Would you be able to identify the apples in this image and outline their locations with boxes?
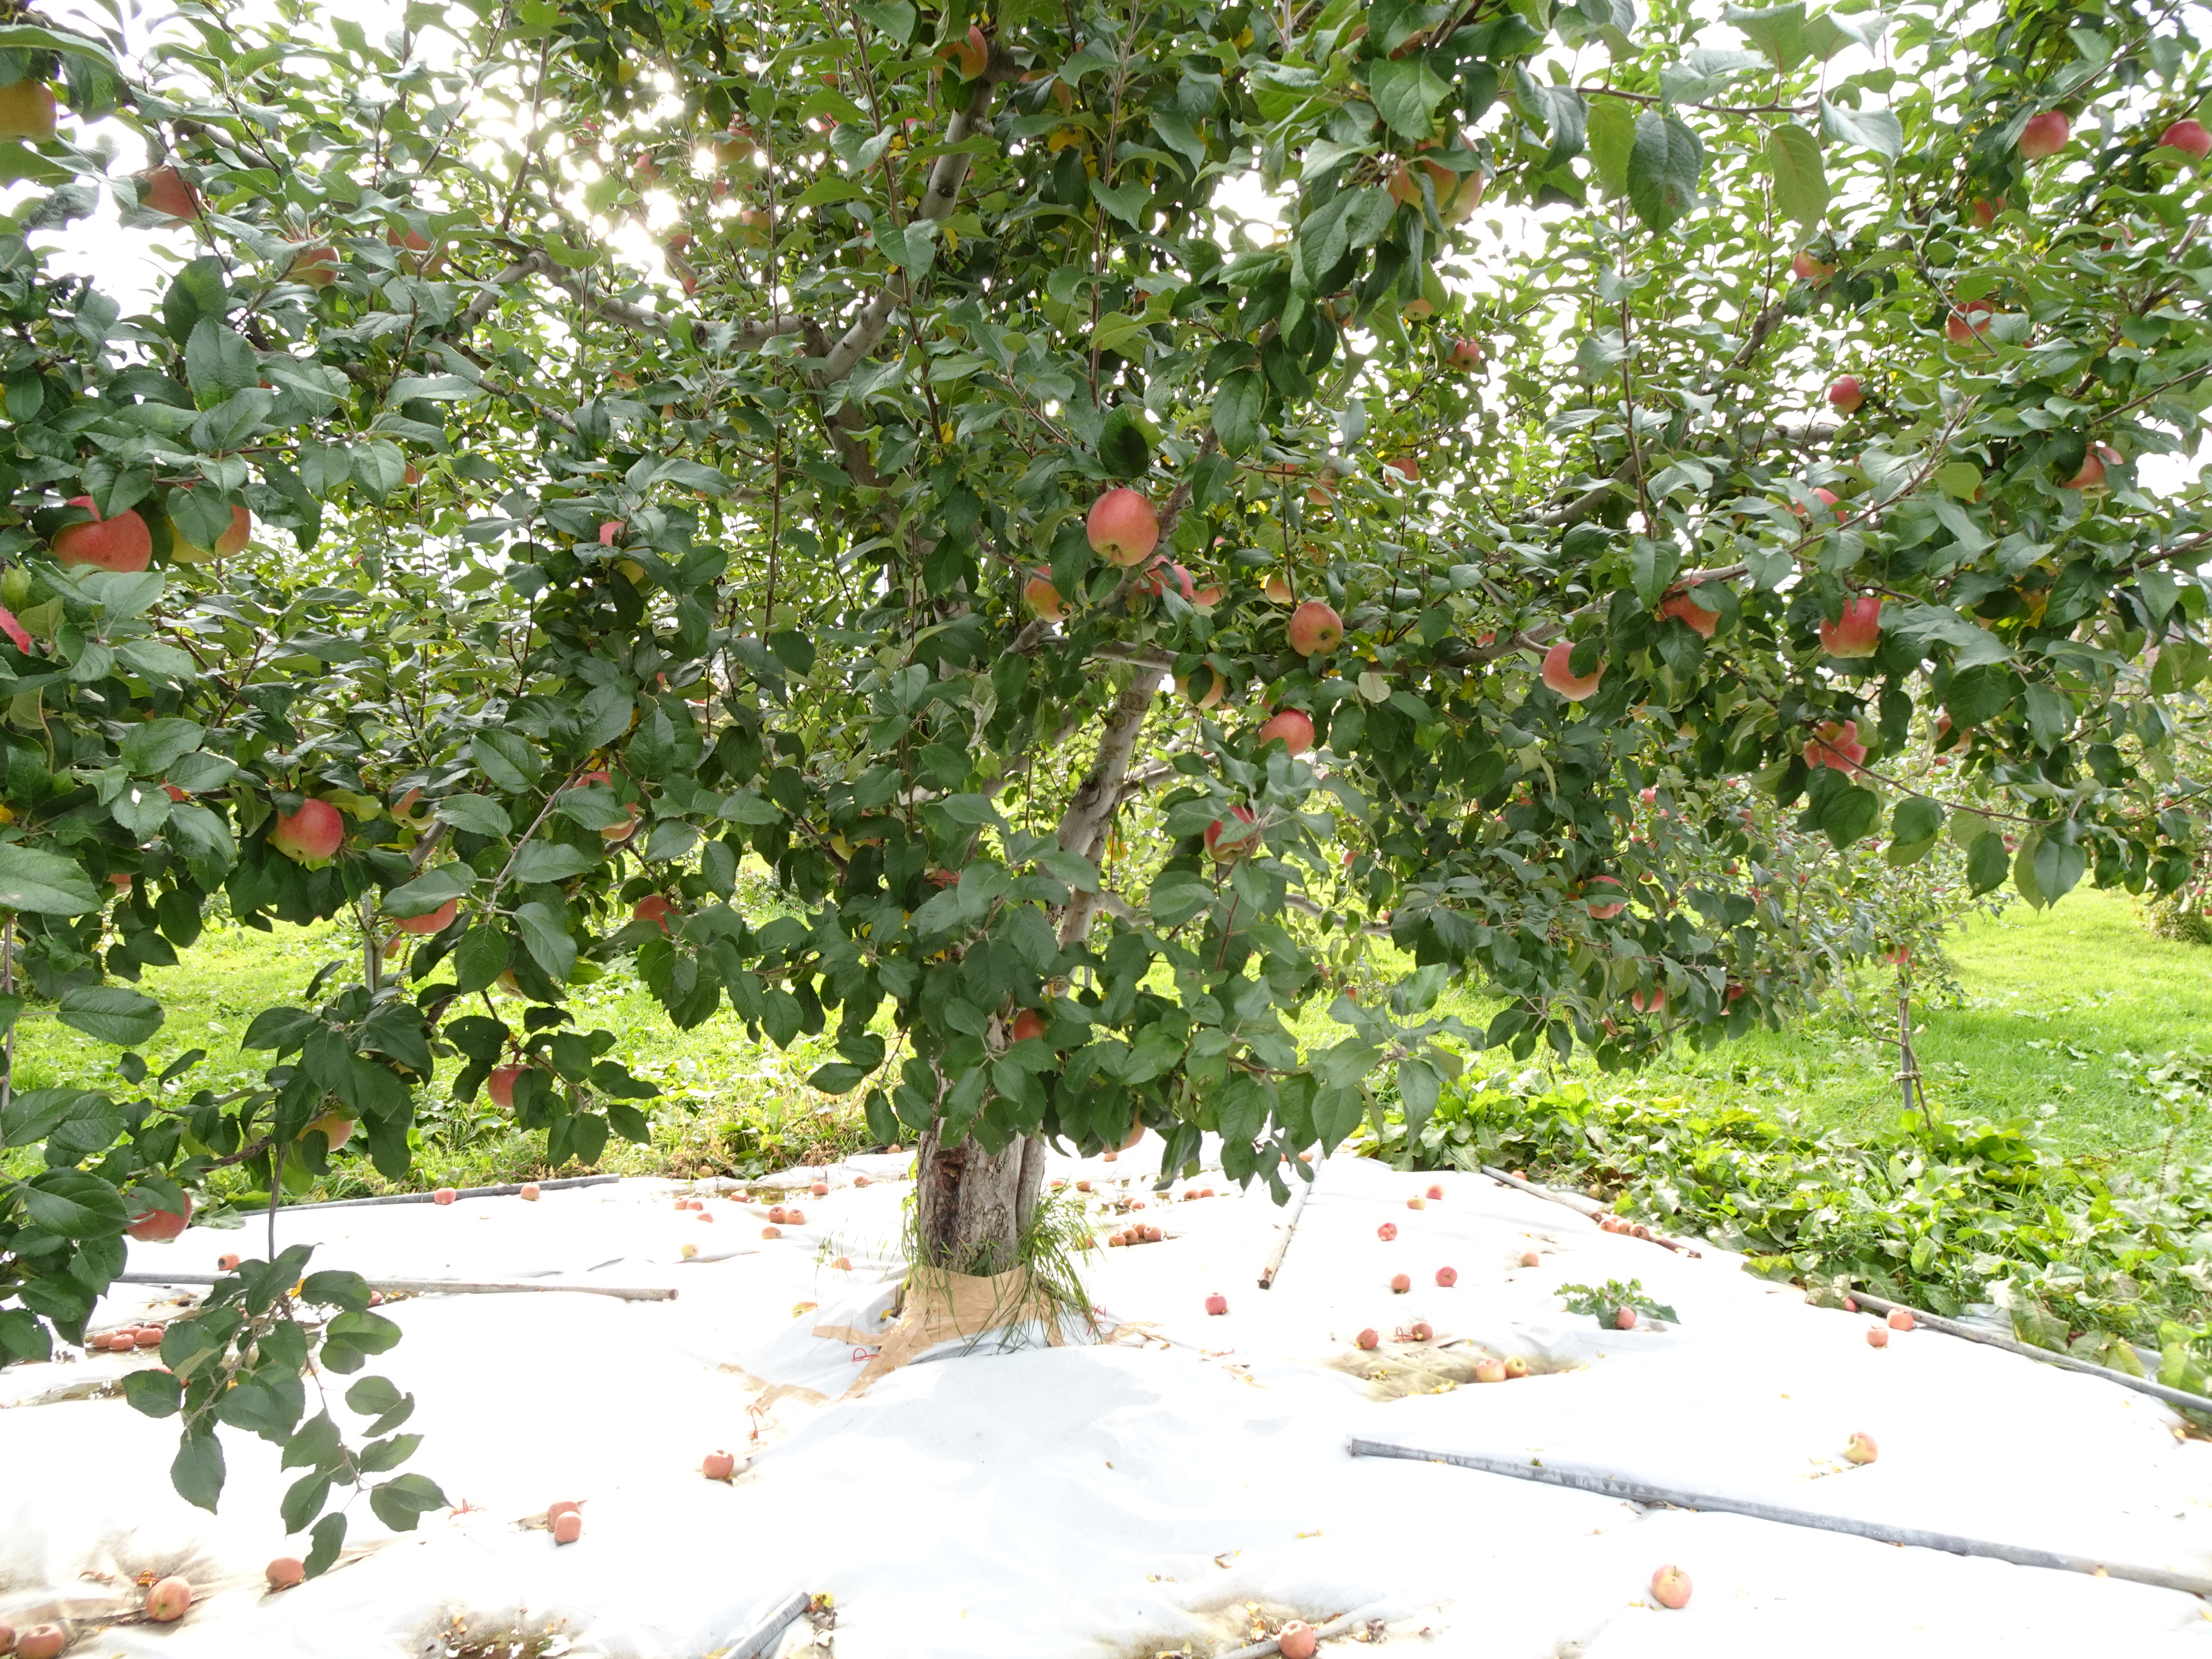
[814,47,863,92]
[265,796,343,862]
[1735,809,1759,828]
[1294,1149,1317,1166]
[1792,243,1839,292]
[45,496,152,587]
[1313,962,1334,983]
[1967,185,2018,231]
[1649,1562,1698,1611]
[1133,560,1195,621]
[713,129,755,173]
[1625,823,1643,833]
[1580,875,1631,919]
[1768,847,1784,860]
[2162,794,2179,812]
[859,228,898,267]
[1722,860,1743,878]
[663,248,696,283]
[1494,812,1514,834]
[1976,591,2010,633]
[123,166,201,232]
[1932,754,1950,768]
[681,270,716,302]
[1200,733,1239,772]
[2016,110,2070,162]
[264,1556,311,1585]
[18,1624,65,1659]
[2173,801,2198,820]
[1468,913,1492,929]
[1646,838,1660,851]
[897,113,945,151]
[1348,18,1426,78]
[608,352,645,390]
[1674,702,1709,742]
[1288,599,1345,659]
[739,210,772,239]
[2007,338,2041,374]
[1819,594,1893,659]
[1802,713,1871,776]
[0,607,38,670]
[1353,156,1384,187]
[1661,806,1674,818]
[657,390,686,419]
[226,346,267,394]
[1258,681,1317,725]
[695,466,723,505]
[393,869,459,936]
[725,169,759,199]
[0,77,59,147]
[355,762,396,799]
[929,842,982,900]
[546,1502,580,1526]
[701,176,728,205]
[1635,867,1656,889]
[1770,868,1793,890]
[2055,444,2126,502]
[1752,962,1774,981]
[1185,562,1235,607]
[630,660,669,702]
[569,774,640,829]
[289,1101,354,1151]
[2123,796,2136,810]
[1098,897,1129,927]
[1265,563,1303,602]
[1676,813,1690,828]
[1252,708,1317,764]
[1049,799,1072,819]
[1817,841,1835,858]
[2015,555,2066,614]
[587,515,649,585]
[385,213,447,277]
[1933,886,1950,901]
[965,163,1000,197]
[1631,1041,1663,1062]
[0,1618,19,1645]
[350,549,385,587]
[1379,909,1395,922]
[1278,1619,1320,1659]
[1317,653,1348,677]
[391,1059,420,1084]
[1931,708,1976,753]
[1851,441,1884,474]
[1635,784,1659,810]
[1269,970,1300,999]
[629,893,691,952]
[1063,39,1092,72]
[1978,802,1995,819]
[1466,784,1490,814]
[688,692,720,726]
[783,342,802,362]
[1778,486,1845,541]
[1662,894,1680,910]
[1613,806,1633,826]
[1827,368,1870,419]
[477,339,514,374]
[0,787,16,834]
[1795,870,1811,884]
[1203,806,1263,865]
[569,115,605,144]
[814,102,851,142]
[1598,1012,1627,1036]
[1629,686,1666,723]
[594,800,639,849]
[1085,487,1159,567]
[1879,943,1912,960]
[2157,118,2212,171]
[552,1509,586,1546]
[1541,641,1608,703]
[1669,829,1686,843]
[1517,792,1533,811]
[2195,884,2210,898]
[494,941,551,1004]
[1746,887,1764,901]
[2157,831,2173,850]
[131,777,186,826]
[1298,543,1329,569]
[1682,881,1699,899]
[1171,655,1228,709]
[724,627,749,650]
[1868,838,1884,854]
[1795,838,1813,853]
[570,743,606,776]
[1437,332,1483,375]
[1319,290,1359,333]
[1014,67,1073,135]
[936,309,978,350]
[2005,833,2018,846]
[1338,983,1363,1003]
[2003,783,2025,804]
[2130,812,2152,825]
[2096,220,2136,259]
[1473,618,1512,656]
[1339,848,1368,872]
[631,152,667,192]
[1381,454,1422,489]
[1131,289,1174,322]
[1725,776,1742,792]
[1627,976,1667,1016]
[125,1184,192,1245]
[267,748,320,790]
[382,438,428,484]
[1259,437,1306,483]
[827,804,885,867]
[91,848,137,900]
[1774,812,1791,828]
[373,932,403,959]
[145,1575,195,1622]
[1945,297,2001,347]
[930,20,989,86]
[1047,119,1098,186]
[448,488,477,514]
[265,235,340,288]
[1390,115,1487,236]
[1212,530,1245,559]
[1083,1098,1150,1155]
[1631,834,1646,850]
[486,1062,543,1109]
[1204,849,1237,888]
[165,482,252,566]
[662,218,692,250]
[1779,796,1801,816]
[1023,562,1085,625]
[1711,983,1750,1019]
[1009,1007,1067,1060]
[931,938,965,970]
[2201,902,2212,919]
[392,773,447,833]
[1531,845,1556,864]
[1657,577,1732,646]
[1558,872,1592,907]
[1401,294,1437,332]
[1307,468,1350,508]
[863,147,900,186]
